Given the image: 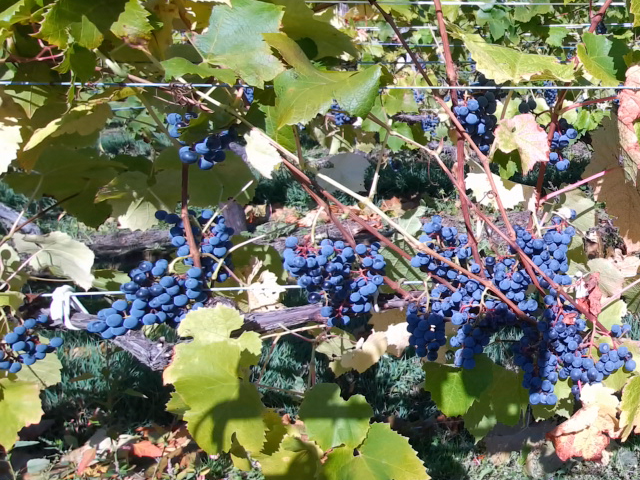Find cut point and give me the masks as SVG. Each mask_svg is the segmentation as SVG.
<instances>
[{"instance_id":"1","label":"cut point","mask_w":640,"mask_h":480,"mask_svg":"<svg viewBox=\"0 0 640 480\" xmlns=\"http://www.w3.org/2000/svg\"><path fill=\"white\" fill-rule=\"evenodd\" d=\"M188 257H191V255H190V254H185V255H183V256H177V257H175V258L172 260L171 265H175V263H176L178 260H180V259H186V258H188Z\"/></svg>"},{"instance_id":"2","label":"cut point","mask_w":640,"mask_h":480,"mask_svg":"<svg viewBox=\"0 0 640 480\" xmlns=\"http://www.w3.org/2000/svg\"><path fill=\"white\" fill-rule=\"evenodd\" d=\"M321 211H322V210H321V209H320V207H319V208H318V211H317V213H316V215H315V216H314V218H313V221H312V227H315V223H316L317 219L319 218V216H320V214H321Z\"/></svg>"},{"instance_id":"3","label":"cut point","mask_w":640,"mask_h":480,"mask_svg":"<svg viewBox=\"0 0 640 480\" xmlns=\"http://www.w3.org/2000/svg\"><path fill=\"white\" fill-rule=\"evenodd\" d=\"M488 289H489V287H487V286H485V287H484V289H483V293H482V295H481V299H480V301H479V303H480V304H484L483 299H484L485 293H486V291H487Z\"/></svg>"},{"instance_id":"4","label":"cut point","mask_w":640,"mask_h":480,"mask_svg":"<svg viewBox=\"0 0 640 480\" xmlns=\"http://www.w3.org/2000/svg\"><path fill=\"white\" fill-rule=\"evenodd\" d=\"M533 221H534V223H535V226H536V228H537V231H538V232H541V228H540V225H539V223H538V220H537V218H536L535 214H534V220H533Z\"/></svg>"}]
</instances>
